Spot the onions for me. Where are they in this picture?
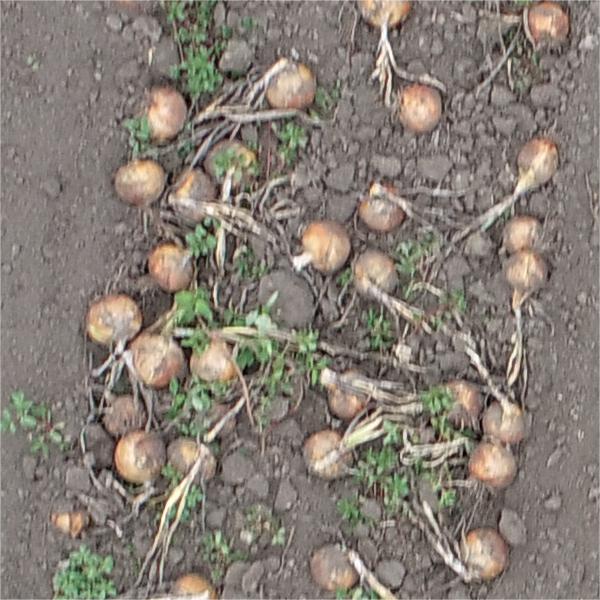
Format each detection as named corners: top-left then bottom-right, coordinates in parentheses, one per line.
top-left (211, 142), bottom-right (255, 181)
top-left (468, 439), bottom-right (516, 486)
top-left (144, 87), bottom-right (185, 139)
top-left (305, 429), bottom-right (348, 477)
top-left (130, 328), bottom-right (184, 388)
top-left (82, 295), bottom-right (141, 347)
top-left (103, 391), bottom-right (143, 434)
top-left (168, 165), bottom-right (212, 201)
top-left (394, 84), bottom-right (440, 132)
top-left (510, 138), bottom-right (558, 193)
top-left (166, 437), bottom-right (212, 482)
top-left (114, 158), bottom-right (164, 204)
top-left (326, 388), bottom-right (364, 419)
top-left (309, 546), bottom-right (356, 588)
top-left (191, 338), bottom-right (239, 382)
top-left (361, 199), bottom-right (403, 232)
top-left (460, 526), bottom-right (509, 579)
top-left (299, 220), bottom-right (350, 270)
top-left (355, 249), bottom-right (395, 290)
top-left (502, 215), bottom-right (541, 252)
top-left (52, 507), bottom-right (87, 535)
top-left (358, 1), bottom-right (412, 28)
top-left (262, 59), bottom-right (314, 110)
top-left (148, 242), bottom-right (193, 289)
top-left (502, 251), bottom-right (549, 293)
top-left (523, 4), bottom-right (567, 45)
top-left (170, 570), bottom-right (212, 599)
top-left (115, 430), bottom-right (166, 480)
top-left (482, 399), bottom-right (527, 440)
